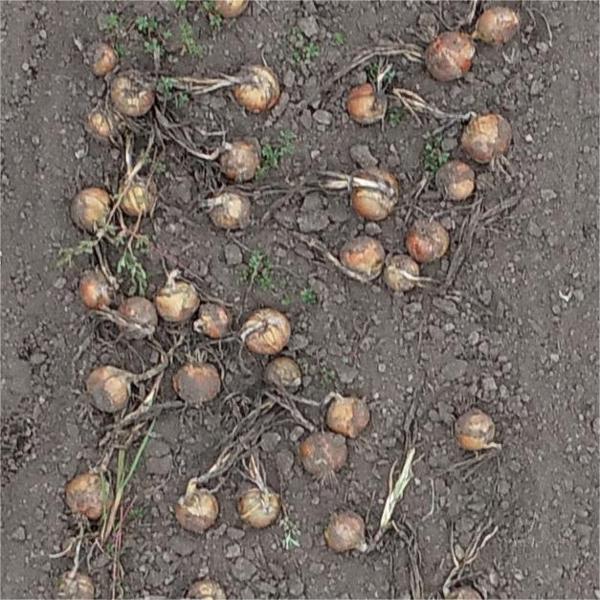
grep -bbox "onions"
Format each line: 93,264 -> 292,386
123,296 -> 155,328
435,160 -> 474,200
233,65 -> 277,109
453,408 -> 493,449
109,75 -> 151,116
324,395 -> 366,436
206,188 -> 248,227
474,4 -> 519,44
324,509 -> 363,550
75,270 -> 113,306
88,44 -> 117,75
298,431 -> 345,474
115,185 -> 151,213
345,84 -> 382,122
69,187 -> 111,230
174,481 -> 216,529
155,278 -> 197,320
56,567 -> 95,599
241,307 -> 288,353
263,356 -> 302,392
62,472 -> 104,521
405,220 -> 448,260
212,0 -> 248,19
186,579 -> 225,599
341,235 -> 382,276
423,29 -> 473,79
87,109 -> 117,137
449,587 -> 482,600
459,113 -> 508,162
85,366 -> 131,412
381,254 -> 420,292
237,485 -> 279,526
351,167 -> 394,219
208,136 -> 255,178
195,301 -> 229,337
170,359 -> 220,404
